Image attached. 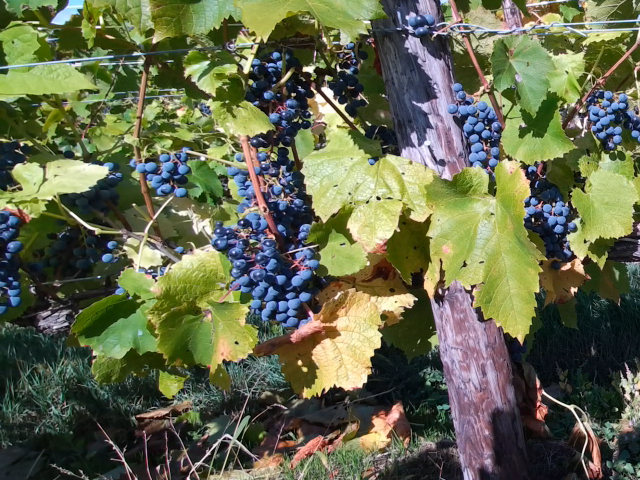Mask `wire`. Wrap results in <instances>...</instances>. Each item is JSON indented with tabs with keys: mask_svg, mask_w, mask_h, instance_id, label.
<instances>
[{
	"mask_svg": "<svg viewBox=\"0 0 640 480\" xmlns=\"http://www.w3.org/2000/svg\"><path fill=\"white\" fill-rule=\"evenodd\" d=\"M105 274L92 275L89 277H81V278H72L69 280H60V281H38V286H63V285H71L74 283H83V282H91L94 280L105 279Z\"/></svg>",
	"mask_w": 640,
	"mask_h": 480,
	"instance_id": "obj_3",
	"label": "wire"
},
{
	"mask_svg": "<svg viewBox=\"0 0 640 480\" xmlns=\"http://www.w3.org/2000/svg\"><path fill=\"white\" fill-rule=\"evenodd\" d=\"M639 24H640L639 20L576 21V22H567V23H548V24L511 26V27L491 29L487 25H480V24L467 23V22L445 21V22L434 24L433 28L439 29V28L448 27V26L457 27L458 25H464L465 28H472V29L451 30V31H431L430 35L431 36H453V35H460V34H497V33L513 32V31H529V30L550 29V28H569V27H578V26H615V25H639Z\"/></svg>",
	"mask_w": 640,
	"mask_h": 480,
	"instance_id": "obj_2",
	"label": "wire"
},
{
	"mask_svg": "<svg viewBox=\"0 0 640 480\" xmlns=\"http://www.w3.org/2000/svg\"><path fill=\"white\" fill-rule=\"evenodd\" d=\"M257 45H258L257 41L228 42V43L211 45V46L191 47L190 49L175 48V49L155 50V51H146V52L108 53V54H102L98 56H90V57H84V58H78V59H55L51 61H33V62H25L20 64L3 65V66H0V71L23 69V68L35 67V66H53L57 64H80V63L100 61V60L110 59V58L148 57V56L169 55V54H177V53H189L190 51L203 52V51L225 49L230 47H251V46H257Z\"/></svg>",
	"mask_w": 640,
	"mask_h": 480,
	"instance_id": "obj_1",
	"label": "wire"
},
{
	"mask_svg": "<svg viewBox=\"0 0 640 480\" xmlns=\"http://www.w3.org/2000/svg\"><path fill=\"white\" fill-rule=\"evenodd\" d=\"M318 248H319L318 244H308V245L301 246V247H299L297 249H294V250H291V251H282L281 255L282 256H293V255H297V254H299L301 252H304V251H308V250H311V249H318Z\"/></svg>",
	"mask_w": 640,
	"mask_h": 480,
	"instance_id": "obj_4",
	"label": "wire"
}]
</instances>
